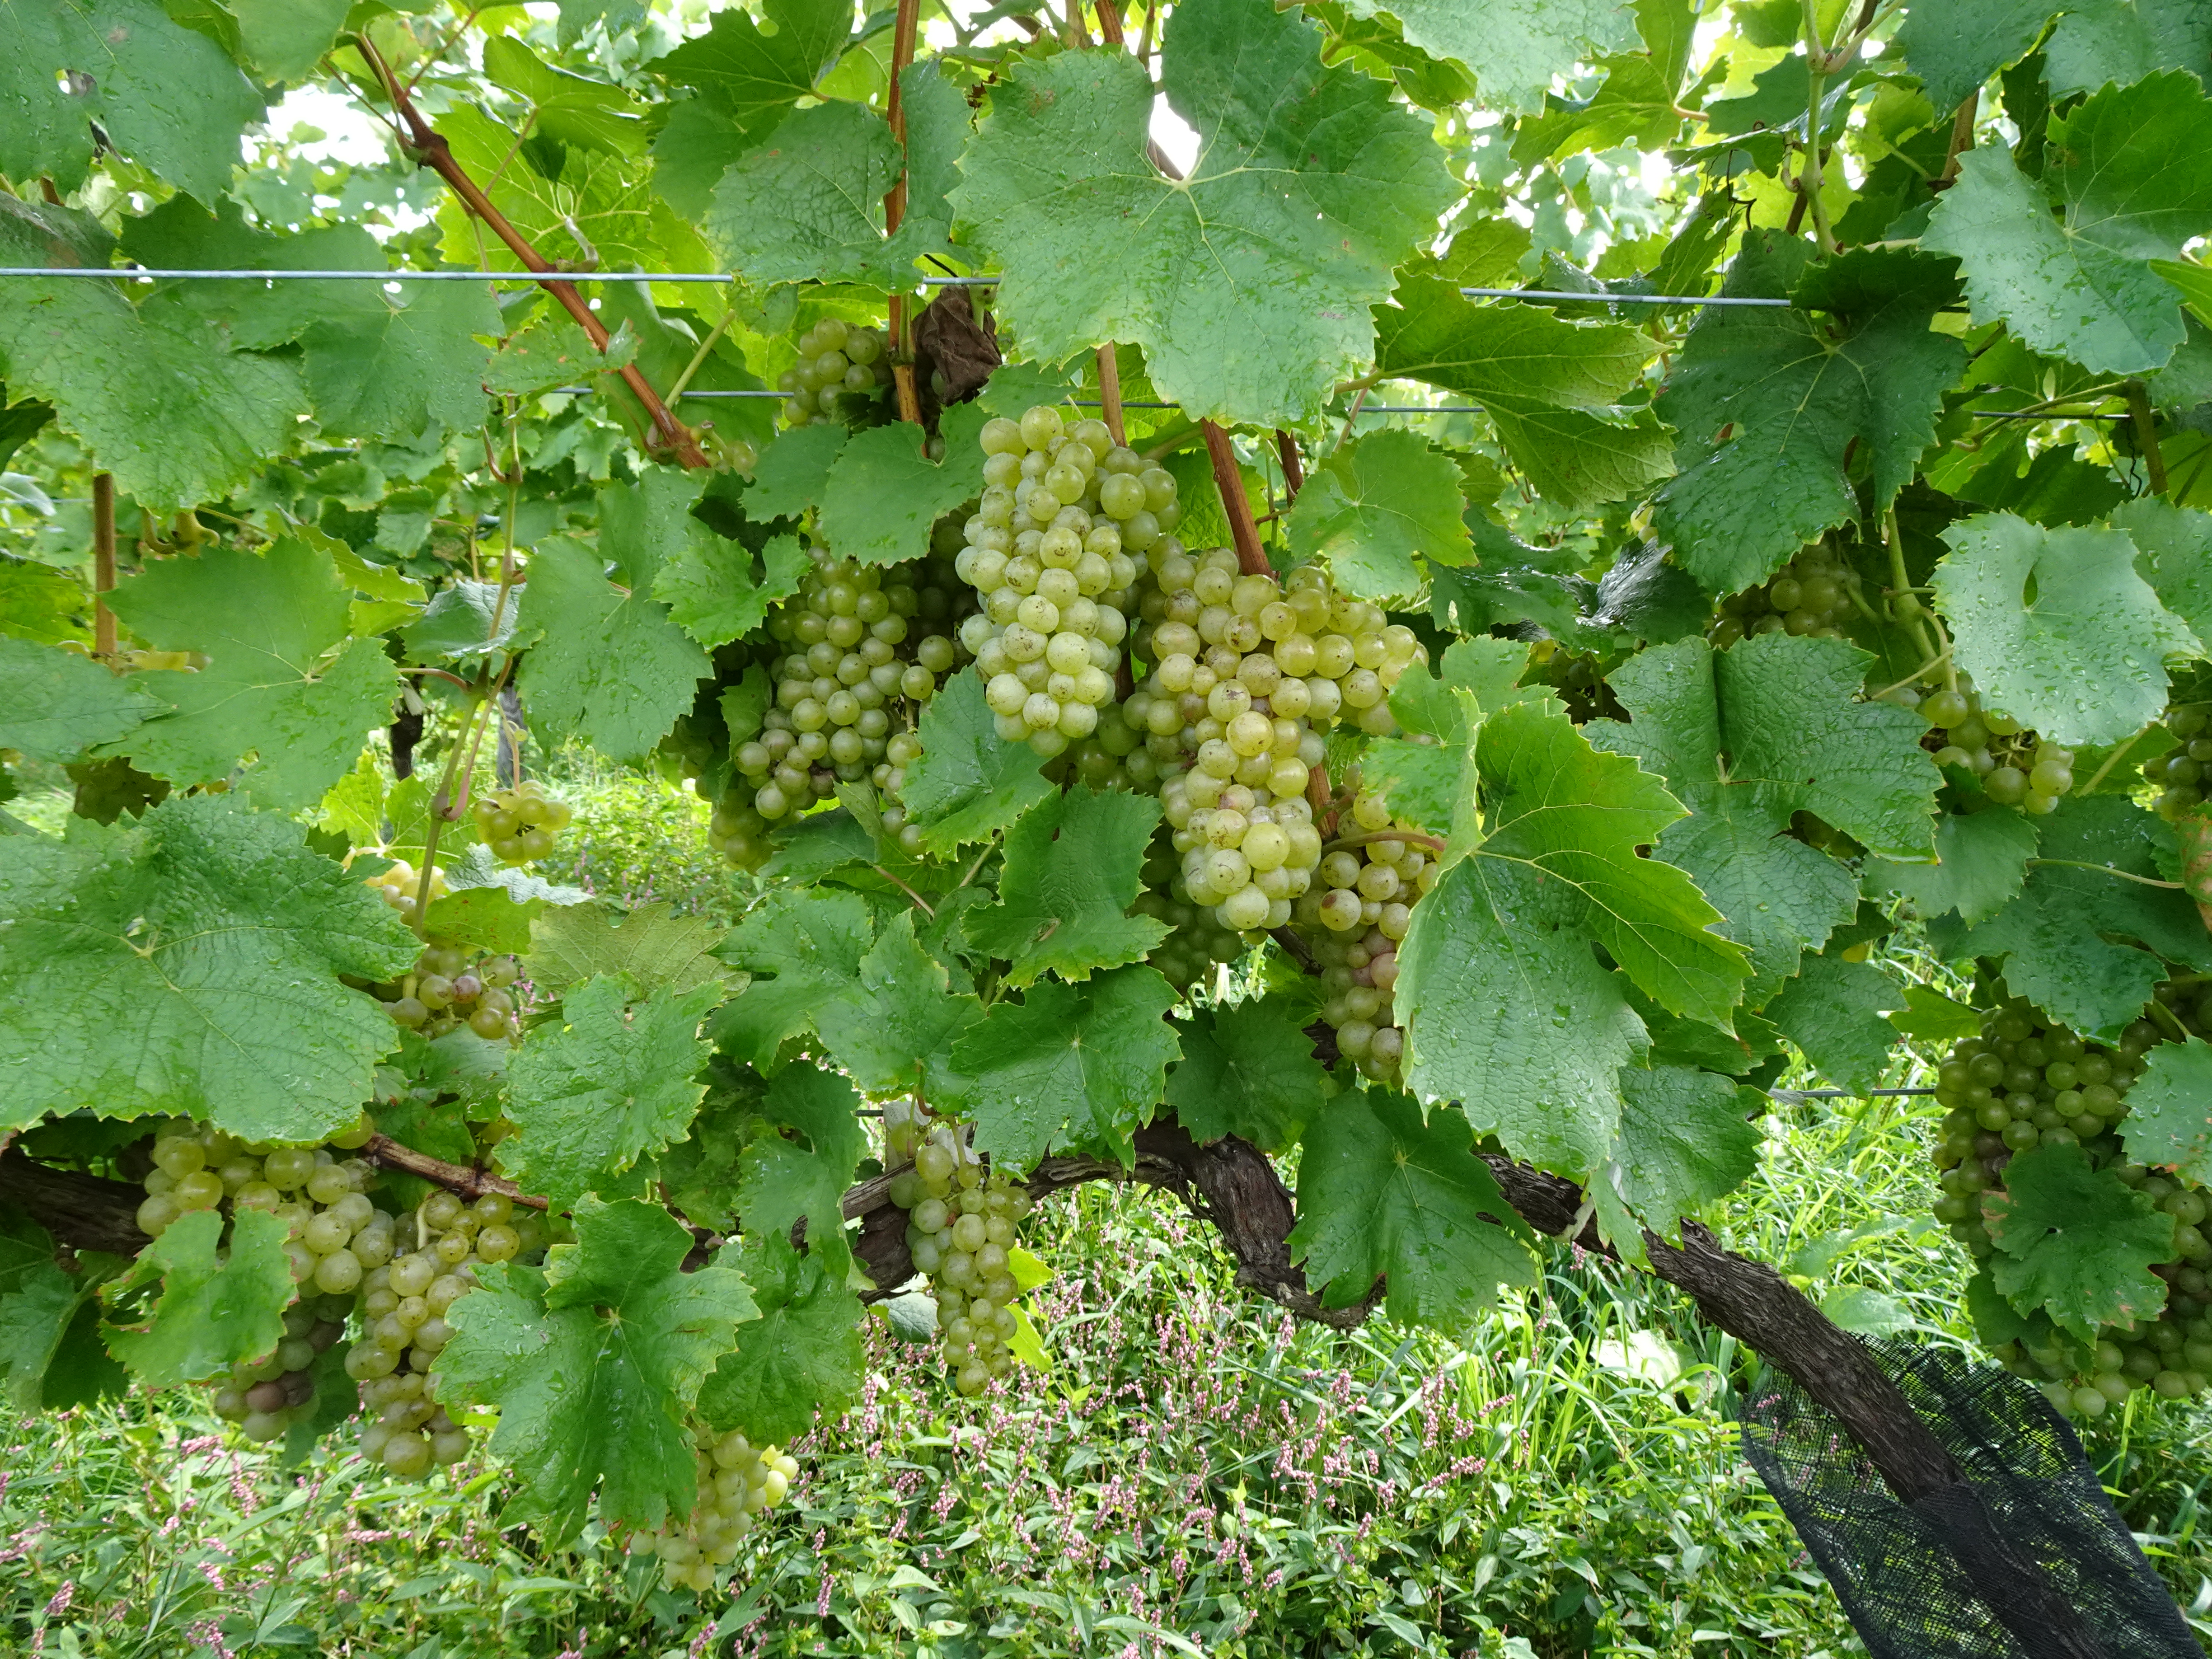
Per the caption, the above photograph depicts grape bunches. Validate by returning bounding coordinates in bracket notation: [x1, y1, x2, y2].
[2155, 946, 2212, 1045]
[872, 733, 928, 855]
[1292, 791, 1444, 1087]
[1058, 702, 1158, 800]
[774, 316, 895, 431]
[1933, 978, 2163, 1257]
[1864, 657, 2074, 814]
[733, 546, 951, 818]
[337, 860, 460, 999]
[2102, 1154, 2212, 1399]
[630, 1420, 799, 1591]
[660, 637, 785, 874]
[136, 1109, 394, 1443]
[1124, 822, 1243, 988]
[471, 781, 570, 868]
[1708, 533, 1865, 652]
[466, 1120, 523, 1175]
[384, 948, 527, 1040]
[891, 1141, 1032, 1396]
[1992, 1308, 2129, 1422]
[955, 405, 1182, 759]
[902, 360, 981, 656]
[345, 1190, 543, 1479]
[2143, 711, 2212, 808]
[1122, 548, 1427, 944]
[1531, 636, 1630, 723]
